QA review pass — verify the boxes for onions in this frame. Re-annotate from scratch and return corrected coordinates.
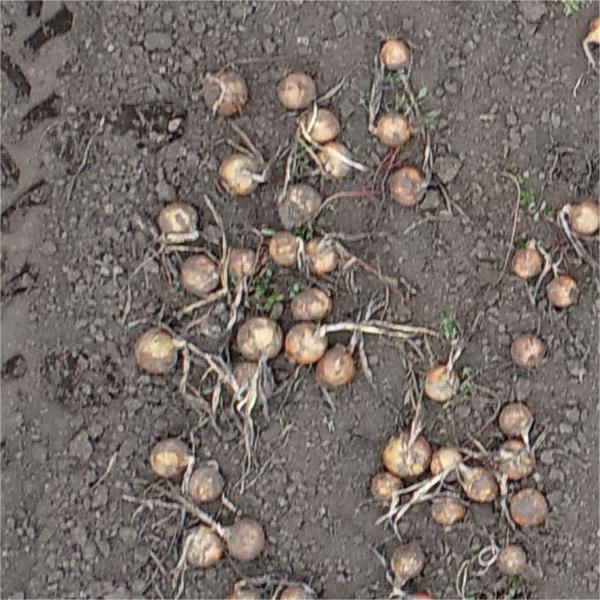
[277,183,320,228]
[546,274,578,306]
[290,287,328,321]
[284,322,324,362]
[267,230,300,266]
[312,144,355,178]
[384,432,431,477]
[506,490,547,528]
[429,447,462,474]
[372,110,408,145]
[387,545,424,584]
[147,438,188,478]
[386,165,424,204]
[277,71,312,107]
[460,465,498,501]
[563,199,597,235]
[179,254,217,294]
[133,327,176,372]
[317,346,353,385]
[420,366,456,402]
[218,153,257,194]
[495,438,530,475]
[185,461,223,502]
[510,245,540,277]
[159,202,196,237]
[300,107,337,140]
[224,246,258,283]
[509,333,544,368]
[203,72,245,115]
[497,544,528,574]
[184,527,223,566]
[230,581,263,600]
[230,363,278,401]
[235,316,280,358]
[307,237,340,272]
[224,518,262,559]
[369,471,399,498]
[278,579,318,600]
[378,40,410,70]
[496,402,531,435]
[431,497,466,525]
